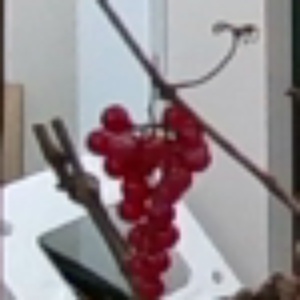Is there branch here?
<instances>
[{
  "label": "branch",
  "mask_w": 300,
  "mask_h": 300,
  "mask_svg": "<svg viewBox=\"0 0 300 300\" xmlns=\"http://www.w3.org/2000/svg\"><path fill=\"white\" fill-rule=\"evenodd\" d=\"M97 7L107 16L110 21V24L114 31L120 35V37L125 41V44L133 51L134 56L139 60V62L143 65V67L148 69V73L152 75V85L156 86L161 90V96L165 100H169L172 105L178 104L181 107H188L191 112L199 115V118L204 125L205 130L210 135L211 139L214 140L223 151L227 152L229 155L233 156L234 159L237 160L242 166L249 170V173L256 178V180L260 183V185L270 193L274 198L277 199L279 203L288 208L293 212H299V209L292 203V201L286 196L285 192L282 190L279 185L278 179L273 178L269 174H265L264 172L259 171L254 165L251 164L243 155H241L232 144L226 140V138L217 132L212 126H210L205 118L198 112L196 109L192 108L188 103L181 100V95L176 94V87H192L196 85H201L211 81L214 76H217L223 68L226 67L228 62L234 56V53L237 50L239 45V39L244 32H248L252 34L253 31H257L255 25L247 24L246 26H242L241 28H236V26L229 25L225 21H218L213 25V36H218L222 33L225 27L231 28L234 30L235 43L228 53L227 57H225L224 61L212 72L208 75L202 77L199 80L190 81L187 83H168L166 79L163 77L160 70L155 69L154 65L149 62L143 53L141 47H137L133 38L128 34L126 29L120 23V18L117 15L116 10L109 5L108 0H96Z\"/></svg>",
  "instance_id": "30e6481e"
}]
</instances>
